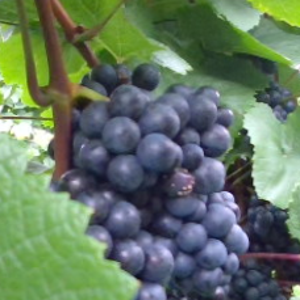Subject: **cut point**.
Wrapping results in <instances>:
<instances>
[{"instance_id": "6a23745f", "label": "cut point", "mask_w": 300, "mask_h": 300, "mask_svg": "<svg viewBox=\"0 0 300 300\" xmlns=\"http://www.w3.org/2000/svg\"><path fill=\"white\" fill-rule=\"evenodd\" d=\"M73 87L76 100L82 98L87 101H111L110 97L102 95L91 88L83 87L80 84H73Z\"/></svg>"}]
</instances>
